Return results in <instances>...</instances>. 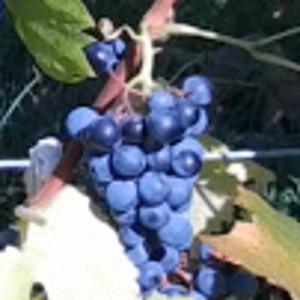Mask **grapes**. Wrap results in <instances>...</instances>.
Segmentation results:
<instances>
[{"label":"grapes","mask_w":300,"mask_h":300,"mask_svg":"<svg viewBox=\"0 0 300 300\" xmlns=\"http://www.w3.org/2000/svg\"><path fill=\"white\" fill-rule=\"evenodd\" d=\"M108 113L74 104L63 113L66 133L91 151L88 178L104 186V203L117 225L127 261L139 268L136 285L147 299L155 296L181 264V252L195 240L186 212L196 197L191 182L204 163L197 138L209 128L205 108L213 85L202 74L187 75L177 90H157L145 82L120 91Z\"/></svg>","instance_id":"obj_1"},{"label":"grapes","mask_w":300,"mask_h":300,"mask_svg":"<svg viewBox=\"0 0 300 300\" xmlns=\"http://www.w3.org/2000/svg\"><path fill=\"white\" fill-rule=\"evenodd\" d=\"M199 263L193 274V288L189 296L193 300H216L224 292L237 300H249L258 290V279L250 272L232 270L225 272L222 264L210 255V247H198Z\"/></svg>","instance_id":"obj_2"},{"label":"grapes","mask_w":300,"mask_h":300,"mask_svg":"<svg viewBox=\"0 0 300 300\" xmlns=\"http://www.w3.org/2000/svg\"><path fill=\"white\" fill-rule=\"evenodd\" d=\"M127 47V42L121 38L92 40L84 46V56L98 75L107 76L120 61Z\"/></svg>","instance_id":"obj_3"}]
</instances>
